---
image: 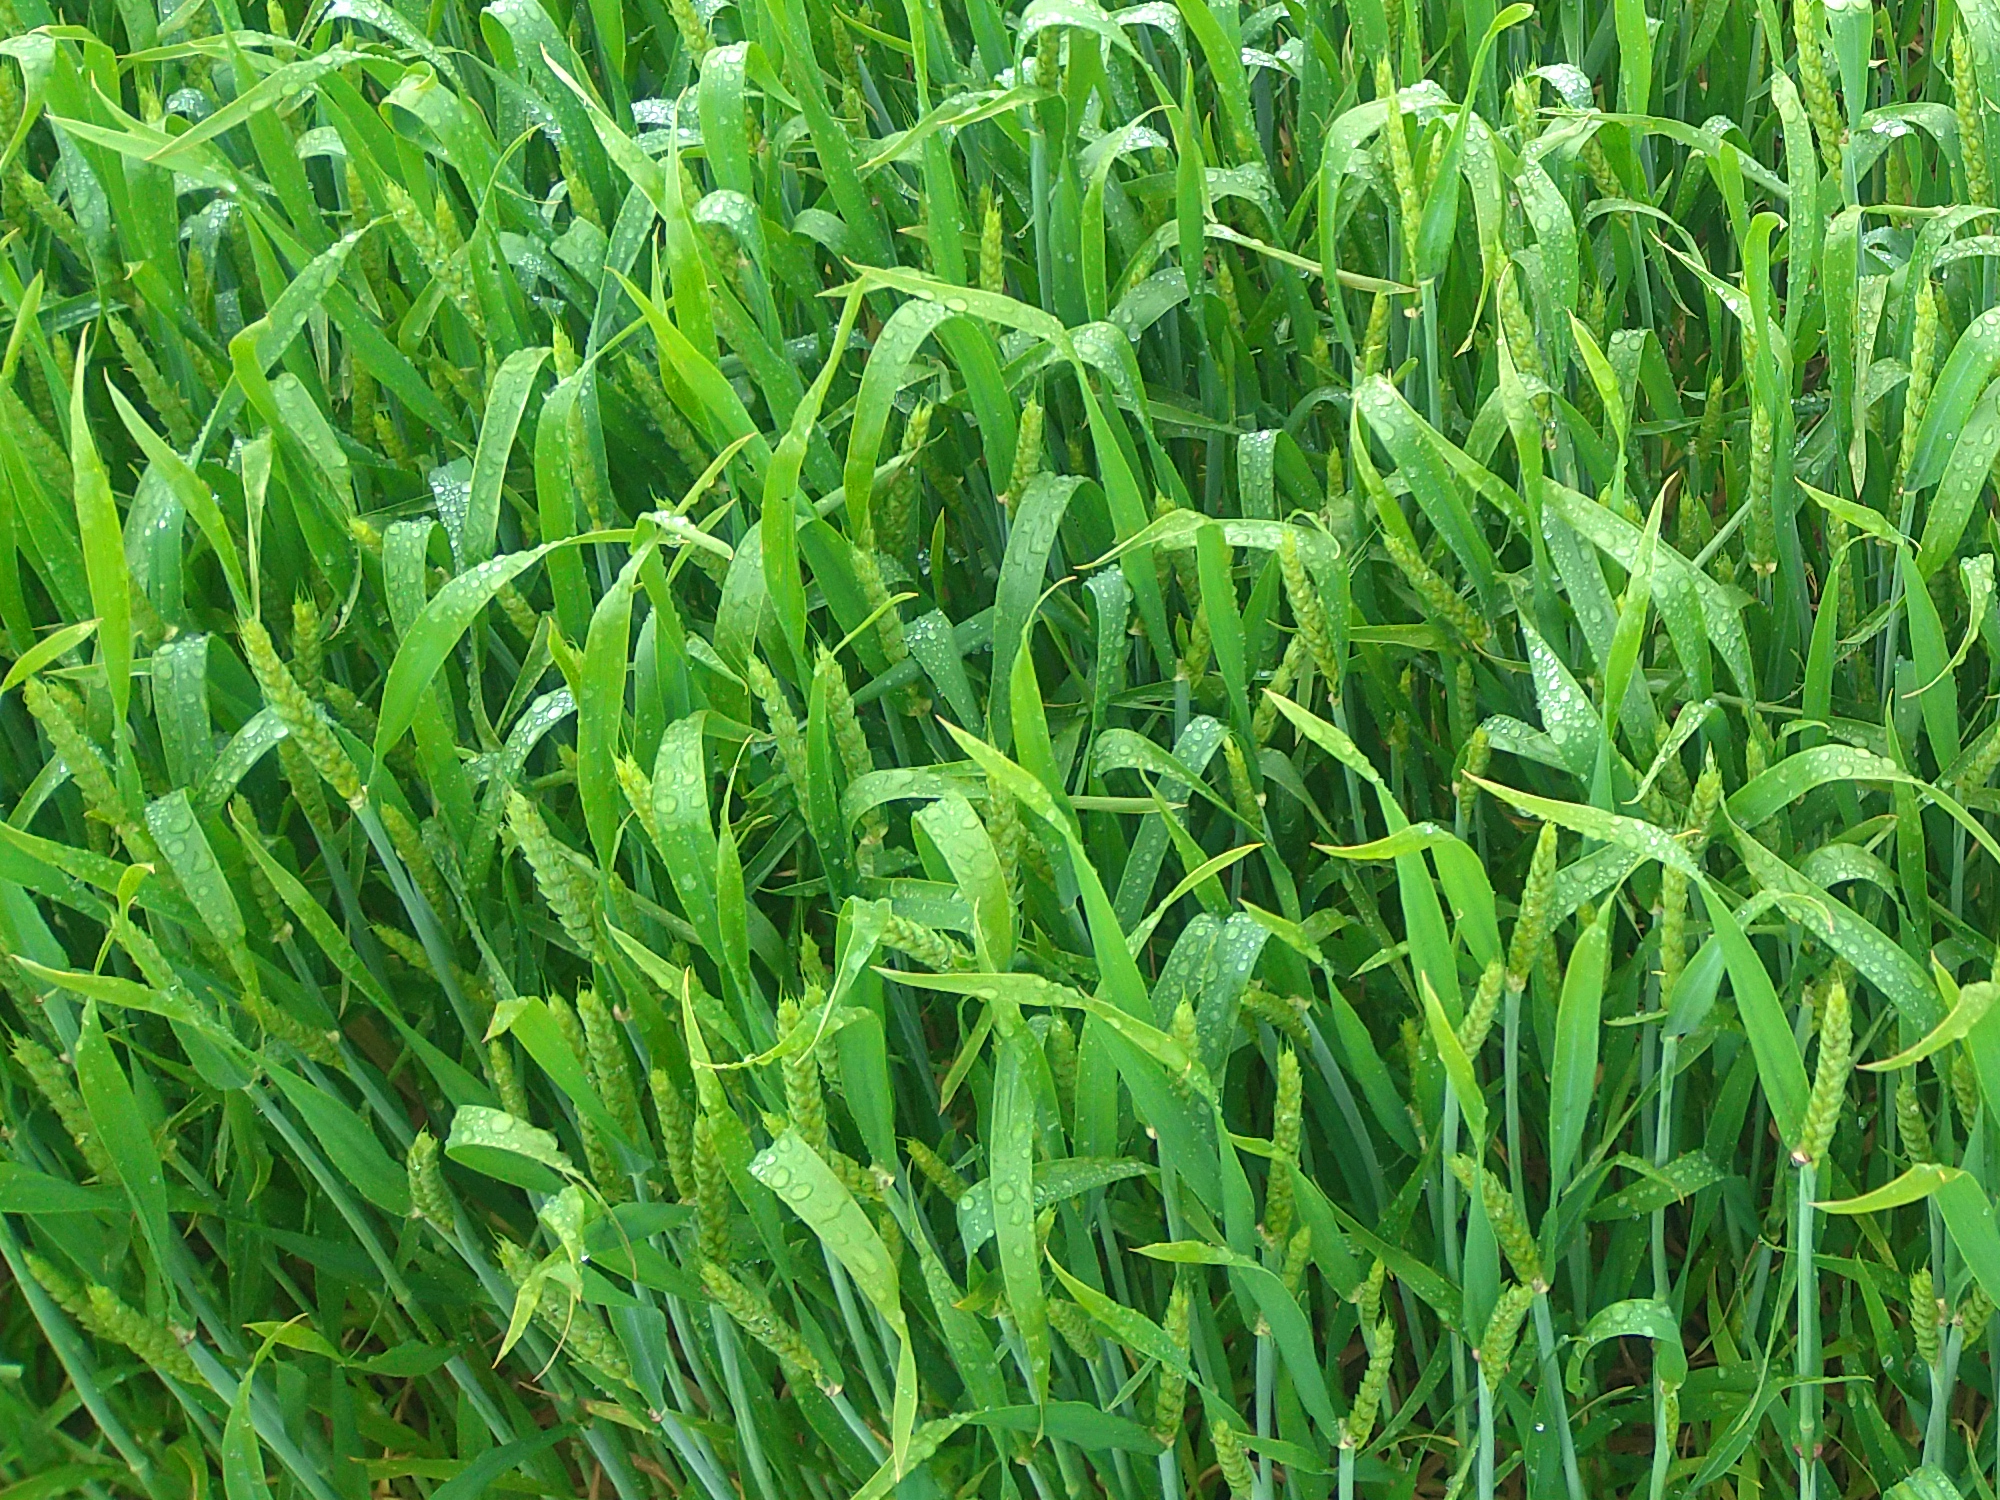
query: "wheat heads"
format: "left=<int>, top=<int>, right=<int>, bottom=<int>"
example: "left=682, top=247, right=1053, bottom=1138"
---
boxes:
left=1386, top=0, right=1406, bottom=54
left=630, top=354, right=710, bottom=476
left=1852, top=647, right=1880, bottom=715
left=1222, top=739, right=1265, bottom=831
left=698, top=1270, right=827, bottom=1381
left=1682, top=767, right=1719, bottom=849
left=1003, top=400, right=1044, bottom=513
left=1742, top=319, right=1758, bottom=378
left=1034, top=0, right=1065, bottom=83
left=576, top=983, right=648, bottom=1146
left=1399, top=1019, right=1423, bottom=1079
left=491, top=1236, right=536, bottom=1285
left=1909, top=1265, right=1943, bottom=1369
left=917, top=456, right=966, bottom=514
left=1953, top=1056, right=1980, bottom=1130
left=1325, top=442, right=1344, bottom=500
left=1275, top=1226, right=1309, bottom=1300
left=1340, top=224, right=1362, bottom=273
left=1809, top=957, right=1857, bottom=1014
left=350, top=357, right=371, bottom=442
left=1508, top=821, right=1558, bottom=982
left=1646, top=719, right=1687, bottom=807
left=798, top=931, right=824, bottom=980
left=1179, top=607, right=1215, bottom=682
left=504, top=788, right=599, bottom=956
left=518, top=515, right=538, bottom=543
left=1953, top=29, right=1993, bottom=241
left=1069, top=438, right=1085, bottom=474
left=900, top=1133, right=975, bottom=1201
left=566, top=13, right=580, bottom=47
left=483, top=345, right=497, bottom=403
left=1215, top=261, right=1236, bottom=329
left=1362, top=292, right=1391, bottom=360
left=350, top=513, right=382, bottom=552
left=549, top=992, right=592, bottom=1082
left=882, top=405, right=933, bottom=549
left=819, top=641, right=877, bottom=778
left=98, top=1286, right=212, bottom=1389
left=242, top=618, right=362, bottom=794
left=1154, top=1290, right=1192, bottom=1414
left=849, top=543, right=907, bottom=663
left=1458, top=726, right=1490, bottom=820
left=1235, top=985, right=1303, bottom=1030
left=267, top=0, right=294, bottom=62
left=1660, top=864, right=1686, bottom=1013
left=777, top=997, right=833, bottom=1160
left=1212, top=1416, right=1255, bottom=1496
left=981, top=200, right=1003, bottom=293
left=1953, top=1289, right=1992, bottom=1346
left=1, top=944, right=56, bottom=1029
left=1832, top=505, right=1855, bottom=639
left=551, top=324, right=600, bottom=518
left=563, top=168, right=607, bottom=238
left=878, top=1210, right=900, bottom=1261
left=607, top=872, right=648, bottom=943
left=1012, top=819, right=1060, bottom=893
left=1885, top=146, right=1908, bottom=229
left=1621, top=760, right=1668, bottom=822
left=454, top=0, right=474, bottom=44
left=1311, top=336, right=1333, bottom=378
left=987, top=768, right=1017, bottom=897
left=291, top=597, right=326, bottom=700
left=238, top=993, right=344, bottom=1070
left=1167, top=1006, right=1198, bottom=1076
left=32, top=681, right=135, bottom=827
left=1051, top=1017, right=1077, bottom=1125
left=436, top=196, right=466, bottom=271
left=832, top=16, right=864, bottom=86
left=1237, top=198, right=1267, bottom=236
left=376, top=414, right=415, bottom=466
left=1373, top=70, right=1424, bottom=274
left=498, top=583, right=536, bottom=633
left=1121, top=258, right=1146, bottom=305
left=1512, top=80, right=1535, bottom=144
left=680, top=170, right=751, bottom=279
left=1542, top=936, right=1562, bottom=986
left=691, top=544, right=725, bottom=599
left=1361, top=1251, right=1386, bottom=1322
left=1454, top=661, right=1479, bottom=733
left=343, top=160, right=384, bottom=295
left=329, top=682, right=419, bottom=773
left=1963, top=702, right=2000, bottom=801
left=1496, top=241, right=1550, bottom=413
left=377, top=922, right=483, bottom=992
left=1578, top=286, right=1605, bottom=423
left=876, top=909, right=966, bottom=976
left=442, top=363, right=477, bottom=408
left=379, top=801, right=450, bottom=921
left=20, top=169, right=86, bottom=266
left=688, top=1117, right=731, bottom=1261
left=106, top=312, right=195, bottom=443
left=1382, top=536, right=1489, bottom=643
left=127, top=918, right=211, bottom=1030
left=1153, top=487, right=1202, bottom=601
left=185, top=0, right=208, bottom=80
left=385, top=183, right=490, bottom=338
left=619, top=758, right=668, bottom=858
left=1457, top=960, right=1504, bottom=1056
left=1393, top=672, right=1413, bottom=748
left=1248, top=641, right=1301, bottom=738
left=1450, top=1156, right=1539, bottom=1287
left=50, top=333, right=77, bottom=384
left=1749, top=404, right=1775, bottom=546
left=403, top=1130, right=461, bottom=1230
left=666, top=0, right=759, bottom=154
left=1717, top=553, right=1735, bottom=588
left=1894, top=1079, right=1934, bottom=1164
left=1277, top=535, right=1338, bottom=695
left=489, top=1038, right=534, bottom=1128
left=29, top=419, right=76, bottom=503
left=1574, top=114, right=1628, bottom=224
left=801, top=982, right=841, bottom=1080
left=738, top=648, right=809, bottom=804
left=1666, top=1394, right=1680, bottom=1447
left=231, top=210, right=263, bottom=301
left=1480, top=1290, right=1528, bottom=1382
left=1270, top=1041, right=1305, bottom=1223
left=1903, top=286, right=1936, bottom=460
left=761, top=1107, right=876, bottom=1196
left=10, top=1043, right=113, bottom=1185
left=274, top=737, right=332, bottom=839
left=145, top=98, right=163, bottom=124
left=541, top=1290, right=633, bottom=1382
left=1928, top=275, right=1958, bottom=341
left=1743, top=734, right=1784, bottom=853
left=344, top=30, right=363, bottom=88
left=1694, top=0, right=1717, bottom=20
left=231, top=794, right=287, bottom=930
left=1700, top=373, right=1722, bottom=444
left=653, top=1070, right=687, bottom=1195
left=1796, top=0, right=1844, bottom=173
left=86, top=808, right=109, bottom=855
left=1992, top=944, right=2000, bottom=992
left=1242, top=278, right=1287, bottom=340
left=35, top=1255, right=113, bottom=1345
left=1351, top=1317, right=1395, bottom=1415
left=842, top=85, right=876, bottom=142
left=1050, top=1297, right=1094, bottom=1361
left=186, top=245, right=209, bottom=314
left=1676, top=493, right=1697, bottom=554
left=1802, top=983, right=1854, bottom=1158
left=47, top=681, right=88, bottom=730
left=558, top=743, right=581, bottom=780
left=26, top=343, right=59, bottom=421
left=700, top=290, right=748, bottom=354
left=939, top=406, right=960, bottom=447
